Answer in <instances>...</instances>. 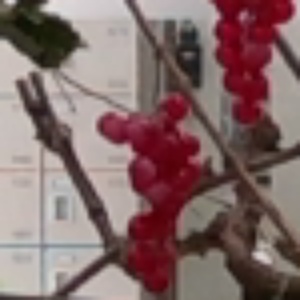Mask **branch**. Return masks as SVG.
Wrapping results in <instances>:
<instances>
[{
    "label": "branch",
    "instance_id": "branch-1",
    "mask_svg": "<svg viewBox=\"0 0 300 300\" xmlns=\"http://www.w3.org/2000/svg\"><path fill=\"white\" fill-rule=\"evenodd\" d=\"M124 3L129 12L132 14L136 25L141 29L143 35L147 39V43L153 50H155V48L159 50L160 57L163 59L175 82L179 85V89L191 99L192 115L207 132L208 136L212 139L213 144L219 148L234 167V171L225 175L216 174L211 178L204 177L201 184L193 190L192 196H200L205 192L214 191L236 180H242L251 190L256 200L263 206L276 228L287 237L292 245L297 246L299 241L288 229L287 222L283 215L273 203L271 198L262 192L260 187L250 175L273 166H279L280 164H284L286 161L300 157V142H297L293 146H290L278 153L242 164L233 152L232 148L227 144L222 134L216 129L208 114L204 110L201 102L195 95V91L192 88L191 77L186 75L174 61L168 49L158 42L157 37L151 32L149 25L146 23L143 13L135 0H124Z\"/></svg>",
    "mask_w": 300,
    "mask_h": 300
},
{
    "label": "branch",
    "instance_id": "branch-2",
    "mask_svg": "<svg viewBox=\"0 0 300 300\" xmlns=\"http://www.w3.org/2000/svg\"><path fill=\"white\" fill-rule=\"evenodd\" d=\"M131 238L128 234L116 241L110 248L104 250L93 258L87 265L78 270L71 279L50 296V300H65L81 284L85 283L93 274L99 272L102 267L114 261L127 251Z\"/></svg>",
    "mask_w": 300,
    "mask_h": 300
},
{
    "label": "branch",
    "instance_id": "branch-3",
    "mask_svg": "<svg viewBox=\"0 0 300 300\" xmlns=\"http://www.w3.org/2000/svg\"><path fill=\"white\" fill-rule=\"evenodd\" d=\"M272 44L276 46L279 53L282 55L295 79L300 81V57L298 56L292 44L281 33V31H279V29H276V36Z\"/></svg>",
    "mask_w": 300,
    "mask_h": 300
}]
</instances>
